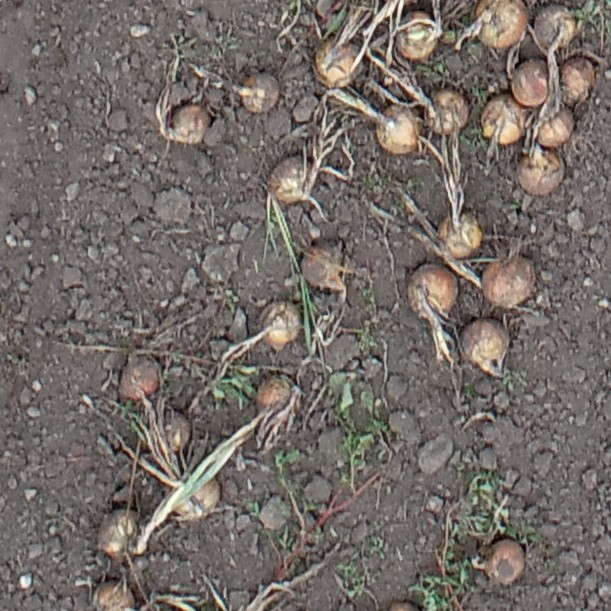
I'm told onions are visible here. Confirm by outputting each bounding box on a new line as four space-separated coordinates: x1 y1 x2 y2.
442 218 481 256
116 357 160 402
300 244 344 291
156 410 191 450
95 513 139 556
91 582 134 609
449 281 488 321
258 304 298 343
236 71 278 113
270 156 311 202
314 38 362 85
515 148 561 193
171 479 218 519
164 103 208 143
532 7 579 50
410 266 457 319
480 540 524 585
253 375 292 419
483 257 535 306
479 3 527 47
426 90 470 132
509 61 549 104
386 599 421 611
375 110 419 154
458 320 506 373
537 112 572 146
479 96 525 142
557 57 597 103
397 11 439 58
